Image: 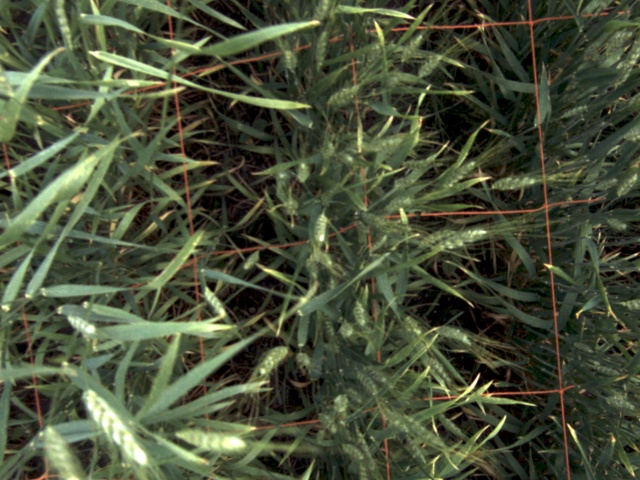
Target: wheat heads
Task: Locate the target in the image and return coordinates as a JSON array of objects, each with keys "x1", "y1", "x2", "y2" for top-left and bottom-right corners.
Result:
[
  {"x1": 383, "y1": 402, "x2": 405, "y2": 436},
  {"x1": 315, "y1": 215, "x2": 327, "y2": 244},
  {"x1": 604, "y1": 30, "x2": 628, "y2": 54},
  {"x1": 82, "y1": 391, "x2": 146, "y2": 461},
  {"x1": 183, "y1": 430, "x2": 240, "y2": 448},
  {"x1": 432, "y1": 325, "x2": 473, "y2": 342},
  {"x1": 353, "y1": 303, "x2": 366, "y2": 328},
  {"x1": 596, "y1": 178, "x2": 616, "y2": 191},
  {"x1": 373, "y1": 135, "x2": 402, "y2": 151},
  {"x1": 386, "y1": 196, "x2": 412, "y2": 211},
  {"x1": 343, "y1": 443, "x2": 365, "y2": 457},
  {"x1": 324, "y1": 87, "x2": 362, "y2": 108},
  {"x1": 419, "y1": 232, "x2": 452, "y2": 249},
  {"x1": 254, "y1": 347, "x2": 290, "y2": 379},
  {"x1": 332, "y1": 395, "x2": 349, "y2": 414},
  {"x1": 402, "y1": 34, "x2": 426, "y2": 60},
  {"x1": 605, "y1": 395, "x2": 633, "y2": 411},
  {"x1": 320, "y1": 414, "x2": 336, "y2": 431},
  {"x1": 570, "y1": 339, "x2": 592, "y2": 352},
  {"x1": 496, "y1": 178, "x2": 532, "y2": 189},
  {"x1": 69, "y1": 318, "x2": 95, "y2": 337},
  {"x1": 447, "y1": 163, "x2": 476, "y2": 191},
  {"x1": 591, "y1": 364, "x2": 618, "y2": 376},
  {"x1": 304, "y1": 257, "x2": 319, "y2": 282},
  {"x1": 584, "y1": 0, "x2": 599, "y2": 18},
  {"x1": 361, "y1": 212, "x2": 389, "y2": 233},
  {"x1": 296, "y1": 165, "x2": 311, "y2": 182},
  {"x1": 396, "y1": 179, "x2": 414, "y2": 191},
  {"x1": 279, "y1": 53, "x2": 298, "y2": 69},
  {"x1": 621, "y1": 175, "x2": 637, "y2": 199},
  {"x1": 400, "y1": 160, "x2": 430, "y2": 168},
  {"x1": 359, "y1": 464, "x2": 369, "y2": 480},
  {"x1": 436, "y1": 410, "x2": 469, "y2": 440},
  {"x1": 616, "y1": 32, "x2": 640, "y2": 87},
  {"x1": 602, "y1": 216, "x2": 627, "y2": 230},
  {"x1": 581, "y1": 43, "x2": 598, "y2": 60},
  {"x1": 244, "y1": 254, "x2": 261, "y2": 270},
  {"x1": 42, "y1": 426, "x2": 77, "y2": 473},
  {"x1": 410, "y1": 420, "x2": 446, "y2": 451},
  {"x1": 321, "y1": 318, "x2": 333, "y2": 338},
  {"x1": 623, "y1": 301, "x2": 639, "y2": 311},
  {"x1": 314, "y1": 0, "x2": 327, "y2": 25},
  {"x1": 419, "y1": 54, "x2": 439, "y2": 76},
  {"x1": 312, "y1": 249, "x2": 333, "y2": 265},
  {"x1": 317, "y1": 33, "x2": 330, "y2": 75},
  {"x1": 423, "y1": 355, "x2": 447, "y2": 382},
  {"x1": 561, "y1": 105, "x2": 589, "y2": 119},
  {"x1": 200, "y1": 288, "x2": 226, "y2": 318},
  {"x1": 358, "y1": 371, "x2": 374, "y2": 397},
  {"x1": 400, "y1": 316, "x2": 421, "y2": 337},
  {"x1": 298, "y1": 351, "x2": 312, "y2": 369},
  {"x1": 50, "y1": 0, "x2": 75, "y2": 46},
  {"x1": 624, "y1": 123, "x2": 640, "y2": 141},
  {"x1": 338, "y1": 321, "x2": 352, "y2": 338},
  {"x1": 164, "y1": 439, "x2": 214, "y2": 468},
  {"x1": 461, "y1": 231, "x2": 484, "y2": 241}
]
